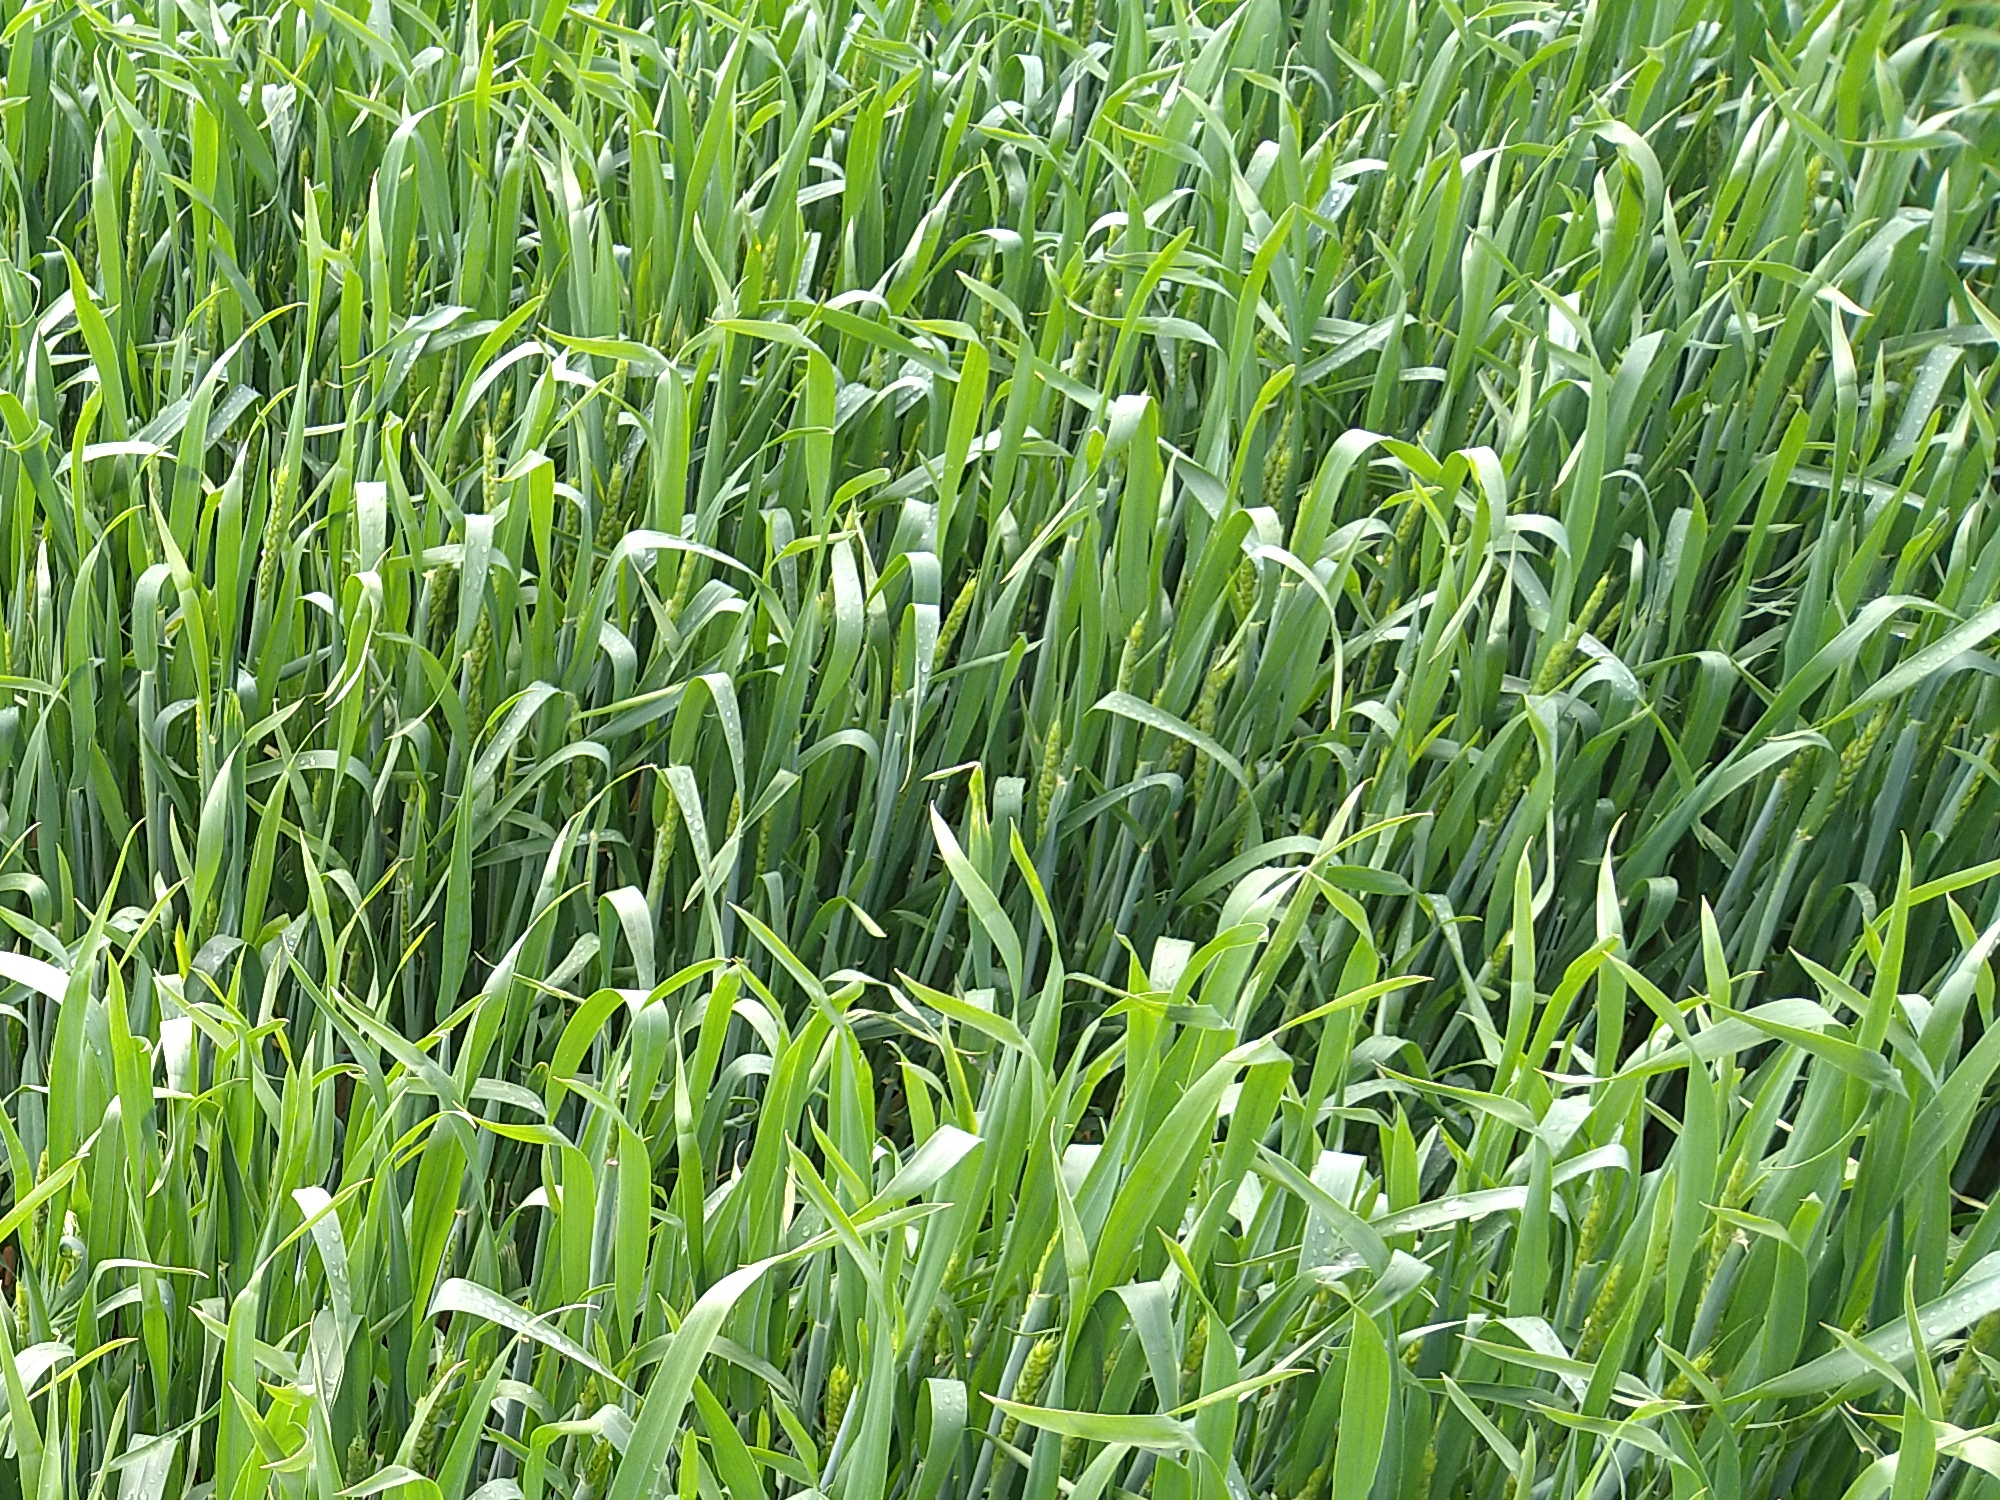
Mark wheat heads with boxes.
[254,466,291,617]
[347,942,366,1012]
[622,445,653,519]
[981,262,999,352]
[1098,314,1109,370]
[568,703,585,811]
[1651,1217,1671,1278]
[872,348,883,389]
[668,543,699,625]
[203,280,220,349]
[1500,339,1523,410]
[15,1279,30,1353]
[1234,765,1253,857]
[1363,610,1394,690]
[1568,1183,1609,1320]
[344,1438,366,1500]
[887,783,908,835]
[1333,117,1355,161]
[603,355,629,440]
[1260,409,1294,484]
[769,277,778,302]
[1926,719,1960,798]
[43,516,53,563]
[1045,392,1061,440]
[1535,574,1613,695]
[1688,1400,1716,1440]
[996,1335,1060,1466]
[1920,670,1966,757]
[1770,349,1822,443]
[1760,743,1814,851]
[447,430,462,489]
[1444,68,1460,116]
[1338,25,1362,83]
[278,226,291,289]
[1121,606,1149,692]
[1502,1469,1517,1500]
[1011,573,1033,640]
[1483,107,1505,152]
[24,568,35,642]
[221,408,243,479]
[1735,359,1770,434]
[1464,370,1493,444]
[461,612,493,734]
[656,790,679,887]
[909,0,929,45]
[1344,72,1354,117]
[440,102,455,171]
[5,629,14,677]
[1372,178,1397,278]
[930,579,978,675]
[1580,597,1626,660]
[1807,1317,1866,1409]
[441,576,466,639]
[824,231,844,290]
[1956,742,1996,825]
[244,426,263,531]
[1024,1224,1062,1325]
[1700,224,1726,303]
[1131,112,1157,189]
[678,21,688,73]
[828,1362,850,1451]
[401,879,412,957]
[757,811,772,876]
[1363,499,1424,612]
[1492,932,1513,977]
[1178,1313,1203,1406]
[429,529,460,631]
[341,225,355,259]
[1804,717,1884,829]
[733,141,748,201]
[1396,87,1406,132]
[1073,269,1111,375]
[1505,161,1525,214]
[1037,719,1062,841]
[1548,1440,1567,1474]
[1288,813,1318,860]
[942,1317,966,1352]
[254,176,265,254]
[643,302,657,347]
[1102,1355,1117,1390]
[211,662,222,703]
[567,477,579,582]
[243,277,254,350]
[1336,208,1355,289]
[1801,158,1826,229]
[412,1350,464,1475]
[1412,1444,1437,1500]
[34,1146,50,1240]
[404,365,419,428]
[1079,0,1098,48]
[495,383,515,434]
[892,626,902,694]
[921,1254,959,1355]
[1688,1167,1749,1353]
[712,297,741,339]
[1057,1430,1083,1500]
[1301,82,1316,129]
[591,464,628,571]
[480,399,495,426]
[152,456,165,565]
[1904,673,1925,724]
[1269,446,1294,515]
[396,241,420,318]
[1509,475,1529,536]
[725,795,739,842]
[426,344,458,460]
[85,204,94,283]
[405,781,418,841]
[1246,96,1267,161]
[1414,408,1439,449]
[1174,284,1206,392]
[578,1369,604,1423]
[1482,737,1534,858]
[1239,549,1255,615]
[483,430,500,511]
[583,1444,614,1498]
[444,1228,459,1281]
[1148,659,1175,724]
[1669,1350,1714,1398]
[1278,968,1309,1047]
[1254,304,1282,343]
[908,419,927,473]
[203,902,216,938]
[1453,510,1472,546]
[854,47,870,94]
[83,419,94,470]
[1352,293,1374,320]
[5,212,15,257]
[482,717,500,744]
[1163,665,1230,771]
[1890,370,1920,444]
[447,0,458,30]
[196,706,205,793]
[505,740,520,795]
[835,73,850,126]
[1583,1260,1623,1359]
[1402,1314,1432,1368]
[1434,779,1455,824]
[1936,1311,2000,1416]
[1875,1387,1894,1428]
[266,1154,279,1212]
[687,82,702,132]
[126,157,143,292]
[313,778,323,820]
[1706,123,1723,191]
[322,344,337,379]
[371,98,386,146]
[757,229,779,299]
[1180,566,1191,611]
[1194,695,1213,795]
